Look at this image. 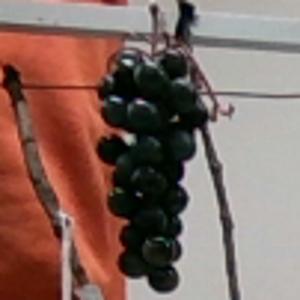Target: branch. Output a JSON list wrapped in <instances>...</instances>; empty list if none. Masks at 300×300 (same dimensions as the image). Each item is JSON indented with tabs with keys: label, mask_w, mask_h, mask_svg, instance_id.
Here are the masks:
<instances>
[{
	"label": "branch",
	"mask_w": 300,
	"mask_h": 300,
	"mask_svg": "<svg viewBox=\"0 0 300 300\" xmlns=\"http://www.w3.org/2000/svg\"><path fill=\"white\" fill-rule=\"evenodd\" d=\"M177 5V19L174 23L173 42L187 58L193 59L194 34L192 28L199 23L195 4L188 0H174Z\"/></svg>",
	"instance_id": "branch-3"
},
{
	"label": "branch",
	"mask_w": 300,
	"mask_h": 300,
	"mask_svg": "<svg viewBox=\"0 0 300 300\" xmlns=\"http://www.w3.org/2000/svg\"><path fill=\"white\" fill-rule=\"evenodd\" d=\"M2 69L3 89L9 97L14 113L25 172L50 223L53 236L64 254L74 294L79 300H106L101 285L93 281L87 269L82 265L76 240L61 218L59 195L49 180L33 133L30 107L23 89L22 73L17 66L6 62L2 63Z\"/></svg>",
	"instance_id": "branch-1"
},
{
	"label": "branch",
	"mask_w": 300,
	"mask_h": 300,
	"mask_svg": "<svg viewBox=\"0 0 300 300\" xmlns=\"http://www.w3.org/2000/svg\"><path fill=\"white\" fill-rule=\"evenodd\" d=\"M204 147L207 171L216 196L218 220L222 232V250L225 261V273L228 282L227 300H243L239 281V264L236 257L235 229L236 223L227 199V186L224 183V165L219 160V153L212 138L209 120L205 128L199 131Z\"/></svg>",
	"instance_id": "branch-2"
}]
</instances>
